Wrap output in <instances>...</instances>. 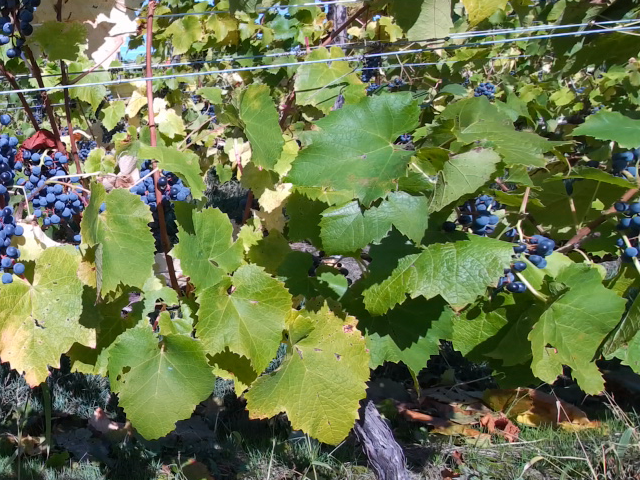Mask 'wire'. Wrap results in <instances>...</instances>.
I'll use <instances>...</instances> for the list:
<instances>
[{
  "label": "wire",
  "mask_w": 640,
  "mask_h": 480,
  "mask_svg": "<svg viewBox=\"0 0 640 480\" xmlns=\"http://www.w3.org/2000/svg\"><path fill=\"white\" fill-rule=\"evenodd\" d=\"M631 23H640V18H629V19H606V20H588V21H578L572 22L563 25H531V26H523V27H511V28H503V29H490V30H478V31H470V32H460V33H451V40L458 39H468L475 37H489L499 34L505 33H514V32H525V31H533V30H565L574 27L580 26H590V25H623V24H631Z\"/></svg>",
  "instance_id": "wire-2"
},
{
  "label": "wire",
  "mask_w": 640,
  "mask_h": 480,
  "mask_svg": "<svg viewBox=\"0 0 640 480\" xmlns=\"http://www.w3.org/2000/svg\"><path fill=\"white\" fill-rule=\"evenodd\" d=\"M409 40H401V41H380V42H372L361 45H342V50H363L374 47H382V46H404L409 45Z\"/></svg>",
  "instance_id": "wire-5"
},
{
  "label": "wire",
  "mask_w": 640,
  "mask_h": 480,
  "mask_svg": "<svg viewBox=\"0 0 640 480\" xmlns=\"http://www.w3.org/2000/svg\"><path fill=\"white\" fill-rule=\"evenodd\" d=\"M145 64L139 65H129V66H120V67H111V68H95V69H83L80 71H70V76H82L86 74H97V73H114V72H122V71H131V70H142L145 69Z\"/></svg>",
  "instance_id": "wire-4"
},
{
  "label": "wire",
  "mask_w": 640,
  "mask_h": 480,
  "mask_svg": "<svg viewBox=\"0 0 640 480\" xmlns=\"http://www.w3.org/2000/svg\"><path fill=\"white\" fill-rule=\"evenodd\" d=\"M307 53L306 49L299 51H286L277 53H262V54H243L236 56H222L218 58H205V59H193V60H181L176 62H159L154 63V68L161 67H179L183 65H195V64H208V63H220L225 61H239L245 59H265V58H279L288 56H302Z\"/></svg>",
  "instance_id": "wire-3"
},
{
  "label": "wire",
  "mask_w": 640,
  "mask_h": 480,
  "mask_svg": "<svg viewBox=\"0 0 640 480\" xmlns=\"http://www.w3.org/2000/svg\"><path fill=\"white\" fill-rule=\"evenodd\" d=\"M635 31H640V25L633 26V27H619V28H613V29L577 30L573 32L553 34V35L538 34V35H529V36L510 38V39H487L484 41L467 42V43L455 44V45H444V46L431 47V48L409 49L404 51L375 52V53L361 54V55H355V56L307 59V60H301L297 62H283L279 64L262 65V66H256V67H235V68H226V69H220V70H214V71H193V72H183V73L167 74V75H147L143 77H128V78H123L116 81L76 83V84H66V85H59V86L25 87V88L2 90L0 91V96L27 93V92L62 91V90L78 89V88L118 86L121 84L130 83V82H145L150 80H169V79H179V78L195 77V76H217V75L237 73V72H258V71H264V70H276L284 67H300V66L310 65V64L357 61V60H363V59H373L377 57L406 56V55L421 54V53L428 54V53L440 52V51H446V50H457V49H464L469 47L486 46L489 44H513V43H520V42H526L531 40H541V39L555 40V39L575 37L579 35L615 34V33H621V32H635Z\"/></svg>",
  "instance_id": "wire-1"
}]
</instances>
